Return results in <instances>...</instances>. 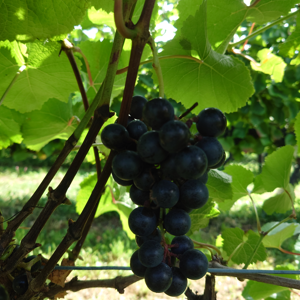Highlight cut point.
<instances>
[{"instance_id": "6a23745f", "label": "cut point", "mask_w": 300, "mask_h": 300, "mask_svg": "<svg viewBox=\"0 0 300 300\" xmlns=\"http://www.w3.org/2000/svg\"><path fill=\"white\" fill-rule=\"evenodd\" d=\"M147 44L150 46L152 55H153L152 67L157 74V78H158V82H159V97L164 98V82H163V75H162L161 67L158 62V49L156 47L155 40L152 37H149L147 39Z\"/></svg>"}]
</instances>
